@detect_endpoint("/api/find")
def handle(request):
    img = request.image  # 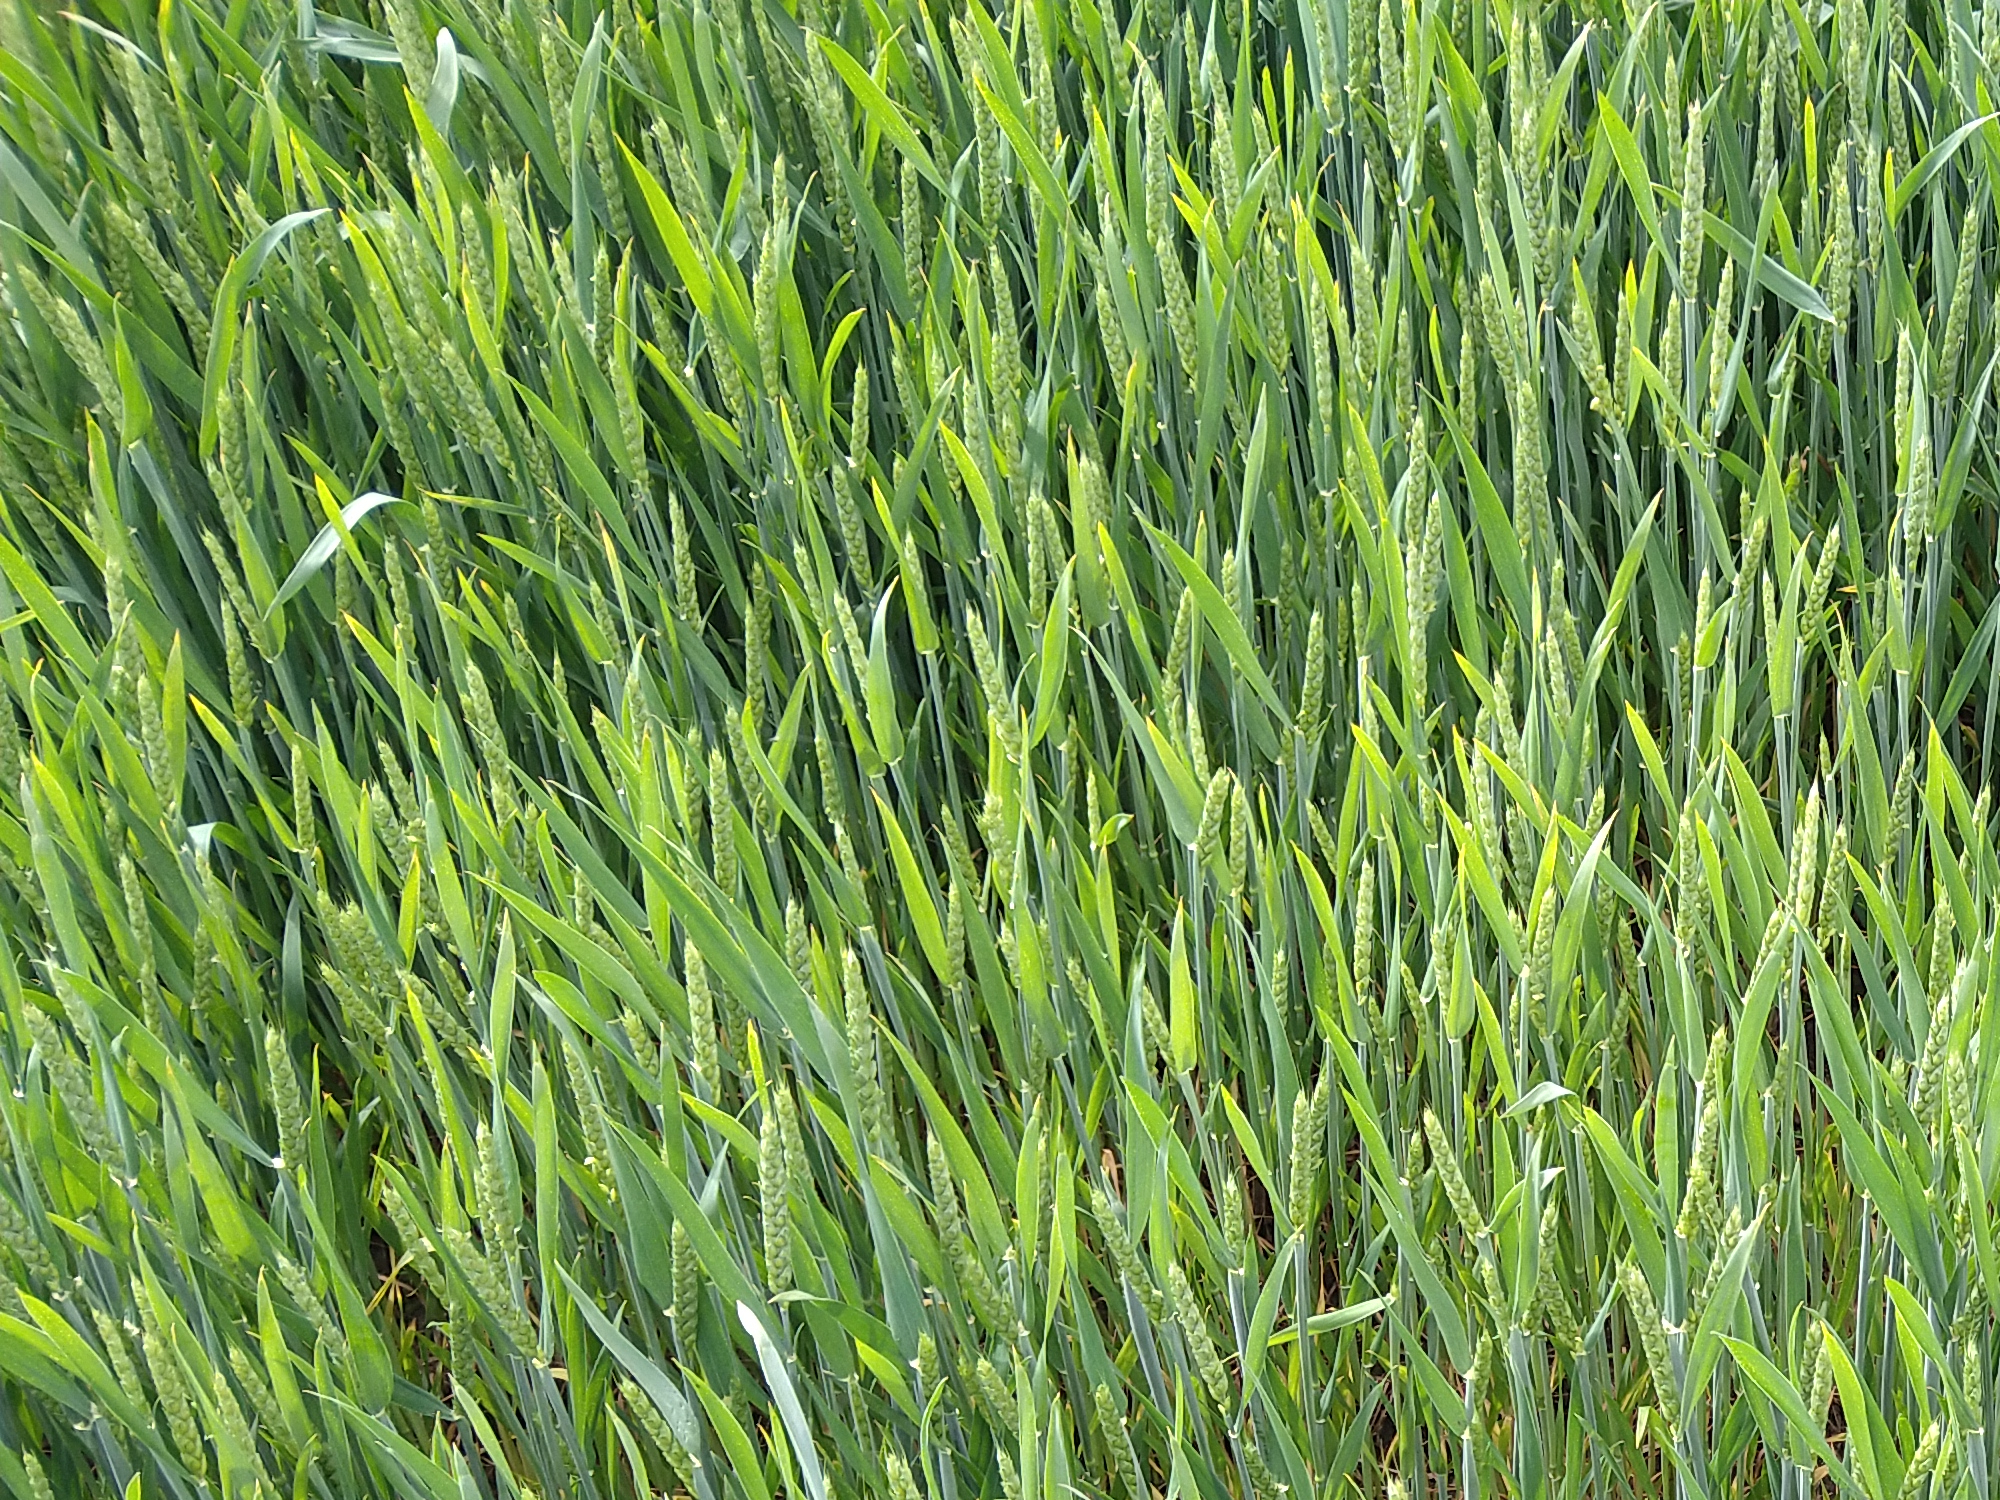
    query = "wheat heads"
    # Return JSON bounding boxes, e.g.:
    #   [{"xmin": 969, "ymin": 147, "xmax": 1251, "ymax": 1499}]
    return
[
  {"xmin": 1141, "ymin": 1004, "xmax": 1158, "ymax": 1072},
  {"xmin": 1912, "ymin": 995, "xmax": 1953, "ymax": 1135},
  {"xmin": 756, "ymin": 230, "xmax": 782, "ymax": 398},
  {"xmin": 806, "ymin": 0, "xmax": 835, "ymax": 37},
  {"xmin": 1796, "ymin": 528, "xmax": 1840, "ymax": 632},
  {"xmin": 955, "ymin": 1249, "xmax": 1016, "ymax": 1341},
  {"xmin": 1994, "ymin": 290, "xmax": 2000, "ymax": 407},
  {"xmin": 648, "ymin": 292, "xmax": 700, "ymax": 393},
  {"xmin": 1752, "ymin": 925, "xmax": 1792, "ymax": 988},
  {"xmin": 539, "ymin": 40, "xmax": 573, "ymax": 177},
  {"xmin": 142, "ymin": 1337, "xmax": 208, "ymax": 1480},
  {"xmin": 1354, "ymin": 859, "xmax": 1377, "ymax": 1005},
  {"xmin": 834, "ymin": 597, "xmax": 869, "ymax": 684},
  {"xmin": 1831, "ymin": 179, "xmax": 1850, "ymax": 320},
  {"xmin": 1517, "ymin": 381, "xmax": 1557, "ymax": 561},
  {"xmin": 1452, "ymin": 0, "xmax": 1470, "ymax": 62},
  {"xmin": 967, "ymin": 611, "xmax": 1025, "ymax": 757},
  {"xmin": 418, "ymin": 492, "xmax": 458, "ymax": 601},
  {"xmin": 1545, "ymin": 631, "xmax": 1565, "ymax": 731},
  {"xmin": 1755, "ymin": 75, "xmax": 1775, "ymax": 193},
  {"xmin": 1300, "ymin": 599, "xmax": 1326, "ymax": 740},
  {"xmin": 303, "ymin": 485, "xmax": 327, "ymax": 534},
  {"xmin": 683, "ymin": 943, "xmax": 719, "ymax": 1086},
  {"xmin": 273, "ymin": 1252, "xmax": 353, "ymax": 1371},
  {"xmin": 1892, "ymin": 71, "xmax": 1910, "ymax": 190},
  {"xmin": 1612, "ymin": 984, "xmax": 1634, "ymax": 1046},
  {"xmin": 948, "ymin": 879, "xmax": 967, "ymax": 989},
  {"xmin": 1730, "ymin": 521, "xmax": 1766, "ymax": 641},
  {"xmin": 1489, "ymin": 666, "xmax": 1525, "ymax": 785},
  {"xmin": 1321, "ymin": 942, "xmax": 1345, "ymax": 1029},
  {"xmin": 266, "ymin": 0, "xmax": 311, "ymax": 96},
  {"xmin": 1699, "ymin": 1026, "xmax": 1726, "ymax": 1133},
  {"xmin": 1944, "ymin": 205, "xmax": 1978, "ymax": 399},
  {"xmin": 439, "ymin": 1229, "xmax": 533, "ymax": 1361},
  {"xmin": 441, "ymin": 348, "xmax": 512, "ymax": 461},
  {"xmin": 1474, "ymin": 102, "xmax": 1489, "ymax": 208},
  {"xmin": 705, "ymin": 0, "xmax": 741, "ymax": 82},
  {"xmin": 1212, "ymin": 149, "xmax": 1228, "ymax": 241},
  {"xmin": 589, "ymin": 114, "xmax": 634, "ymax": 249},
  {"xmin": 1068, "ymin": 959, "xmax": 1089, "ymax": 1016},
  {"xmin": 592, "ymin": 249, "xmax": 611, "ymax": 393},
  {"xmin": 706, "ymin": 752, "xmax": 745, "ymax": 916},
  {"xmin": 1337, "ymin": 583, "xmax": 1345, "ymax": 671},
  {"xmin": 106, "ymin": 220, "xmax": 132, "ymax": 313},
  {"xmin": 1167, "ymin": 1270, "xmax": 1234, "ymax": 1432},
  {"xmin": 1549, "ymin": 561, "xmax": 1565, "ymax": 640},
  {"xmin": 21, "ymin": 1451, "xmax": 76, "ymax": 1500},
  {"xmin": 1562, "ymin": 613, "xmax": 1589, "ymax": 693},
  {"xmin": 1681, "ymin": 100, "xmax": 1703, "ymax": 301},
  {"xmin": 1035, "ymin": 48, "xmax": 1054, "ymax": 162},
  {"xmin": 491, "ymin": 172, "xmax": 549, "ymax": 337},
  {"xmin": 1379, "ymin": 0, "xmax": 1411, "ymax": 140},
  {"xmin": 834, "ymin": 825, "xmax": 867, "ymax": 923},
  {"xmin": 1456, "ymin": 335, "xmax": 1477, "ymax": 453},
  {"xmin": 1806, "ymin": 0, "xmax": 1819, "ymax": 46},
  {"xmin": 472, "ymin": 1171, "xmax": 509, "ymax": 1292},
  {"xmin": 1310, "ymin": 1075, "xmax": 1333, "ymax": 1170},
  {"xmin": 51, "ymin": 441, "xmax": 96, "ymax": 522},
  {"xmin": 992, "ymin": 1432, "xmax": 1046, "ymax": 1500},
  {"xmin": 1476, "ymin": 1262, "xmax": 1508, "ymax": 1330},
  {"xmin": 1664, "ymin": 49, "xmax": 1679, "ymax": 193},
  {"xmin": 554, "ymin": 241, "xmax": 592, "ymax": 350},
  {"xmin": 1143, "ymin": 61, "xmax": 1167, "ymax": 246},
  {"xmin": 690, "ymin": 733, "xmax": 702, "ymax": 851},
  {"xmin": 915, "ymin": 1335, "xmax": 946, "ymax": 1436},
  {"xmin": 1179, "ymin": 697, "xmax": 1214, "ymax": 790},
  {"xmin": 104, "ymin": 42, "xmax": 135, "ymax": 104},
  {"xmin": 520, "ymin": 812, "xmax": 542, "ymax": 884},
  {"xmin": 1022, "ymin": 0, "xmax": 1043, "ymax": 101},
  {"xmin": 999, "ymin": 922, "xmax": 1023, "ymax": 989},
  {"xmin": 668, "ymin": 1215, "xmax": 698, "ymax": 1370},
  {"xmin": 630, "ymin": 671, "xmax": 651, "ymax": 752},
  {"xmin": 1659, "ymin": 293, "xmax": 1678, "ymax": 433},
  {"xmin": 1291, "ymin": 1095, "xmax": 1313, "ymax": 1221},
  {"xmin": 23, "ymin": 1007, "xmax": 134, "ymax": 1192},
  {"xmin": 1089, "ymin": 765, "xmax": 1100, "ymax": 845},
  {"xmin": 1352, "ymin": 578, "xmax": 1370, "ymax": 652},
  {"xmin": 1826, "ymin": 86, "xmax": 1848, "ymax": 172},
  {"xmin": 558, "ymin": 1032, "xmax": 619, "ymax": 1195},
  {"xmin": 499, "ymin": 586, "xmax": 537, "ymax": 700},
  {"xmin": 1741, "ymin": 28, "xmax": 1757, "ymax": 94},
  {"xmin": 1464, "ymin": 292, "xmax": 1488, "ymax": 380},
  {"xmin": 900, "ymin": 152, "xmax": 926, "ymax": 313},
  {"xmin": 98, "ymin": 106, "xmax": 146, "ymax": 233},
  {"xmin": 377, "ymin": 739, "xmax": 432, "ymax": 841},
  {"xmin": 359, "ymin": 66, "xmax": 395, "ymax": 210},
  {"xmin": 873, "ymin": 1077, "xmax": 907, "ymax": 1170},
  {"xmin": 1395, "ymin": 307, "xmax": 1414, "ymax": 437},
  {"xmin": 899, "ymin": 26, "xmax": 939, "ymax": 132},
  {"xmin": 1348, "ymin": 0, "xmax": 1384, "ymax": 110},
  {"xmin": 464, "ymin": 204, "xmax": 493, "ymax": 329},
  {"xmin": 1215, "ymin": 109, "xmax": 1236, "ymax": 233},
  {"xmin": 1032, "ymin": 1164, "xmax": 1054, "ymax": 1281},
  {"xmin": 496, "ymin": 0, "xmax": 523, "ymax": 77},
  {"xmin": 480, "ymin": 26, "xmax": 539, "ymax": 193},
  {"xmin": 929, "ymin": 332, "xmax": 961, "ymax": 483},
  {"xmin": 1531, "ymin": 1192, "xmax": 1558, "ymax": 1331},
  {"xmin": 961, "ymin": 379, "xmax": 990, "ymax": 473},
  {"xmin": 1519, "ymin": 141, "xmax": 1551, "ymax": 290},
  {"xmin": 886, "ymin": 1453, "xmax": 934, "ymax": 1500},
  {"xmin": 889, "ymin": 350, "xmax": 929, "ymax": 441},
  {"xmin": 990, "ymin": 244, "xmax": 1021, "ymax": 411},
  {"xmin": 507, "ymin": 409, "xmax": 563, "ymax": 541},
  {"xmin": 1165, "ymin": 680, "xmax": 1186, "ymax": 760},
  {"xmin": 452, "ymin": 1297, "xmax": 474, "ymax": 1420},
  {"xmin": 644, "ymin": 130, "xmax": 660, "ymax": 185},
  {"xmin": 1511, "ymin": 19, "xmax": 1527, "ymax": 160},
  {"xmin": 382, "ymin": 0, "xmax": 440, "ymax": 100},
  {"xmin": 615, "ymin": 1377, "xmax": 692, "ymax": 1493},
  {"xmin": 376, "ymin": 377, "xmax": 437, "ymax": 507},
  {"xmin": 1012, "ymin": 499, "xmax": 1029, "ymax": 581},
  {"xmin": 1953, "ymin": 1277, "xmax": 1988, "ymax": 1337},
  {"xmin": 1688, "ymin": 874, "xmax": 1714, "ymax": 985},
  {"xmin": 1893, "ymin": 1425, "xmax": 1939, "ymax": 1500},
  {"xmin": 0, "ymin": 1193, "xmax": 62, "ymax": 1302},
  {"xmin": 922, "ymin": 1136, "xmax": 972, "ymax": 1293},
  {"xmin": 88, "ymin": 1305, "xmax": 149, "ymax": 1427},
  {"xmin": 1947, "ymin": 1056, "xmax": 1974, "ymax": 1148},
  {"xmin": 1892, "ymin": 332, "xmax": 1907, "ymax": 468},
  {"xmin": 368, "ymin": 274, "xmax": 424, "ymax": 417},
  {"xmin": 1560, "ymin": 887, "xmax": 1581, "ymax": 1018},
  {"xmin": 1422, "ymin": 135, "xmax": 1450, "ymax": 190},
  {"xmin": 1926, "ymin": 882, "xmax": 1951, "ymax": 1005},
  {"xmin": 1353, "ymin": 253, "xmax": 1379, "ymax": 385},
  {"xmin": 1883, "ymin": 0, "xmax": 1905, "ymax": 75},
  {"xmin": 2, "ymin": 326, "xmax": 43, "ymax": 409},
  {"xmin": 383, "ymin": 1188, "xmax": 450, "ymax": 1308},
  {"xmin": 790, "ymin": 545, "xmax": 828, "ymax": 644},
  {"xmin": 592, "ymin": 712, "xmax": 626, "ymax": 817},
  {"xmin": 1944, "ymin": 0, "xmax": 1962, "ymax": 124},
  {"xmin": 1403, "ymin": 5, "xmax": 1418, "ymax": 134},
  {"xmin": 1786, "ymin": 817, "xmax": 1803, "ymax": 915},
  {"xmin": 1367, "ymin": 997, "xmax": 1391, "ymax": 1054},
  {"xmin": 1837, "ymin": 0, "xmax": 1865, "ymax": 77},
  {"xmin": 313, "ymin": 891, "xmax": 377, "ymax": 992},
  {"xmin": 59, "ymin": 300, "xmax": 120, "ymax": 425},
  {"xmin": 24, "ymin": 88, "xmax": 63, "ymax": 204},
  {"xmin": 580, "ymin": 865, "xmax": 592, "ymax": 938},
  {"xmin": 667, "ymin": 501, "xmax": 700, "ymax": 627},
  {"xmin": 1795, "ymin": 1323, "xmax": 1820, "ymax": 1409},
  {"xmin": 841, "ymin": 949, "xmax": 889, "ymax": 1143},
  {"xmin": 906, "ymin": 532, "xmax": 920, "ymax": 606},
  {"xmin": 1867, "ymin": 158, "xmax": 1888, "ymax": 285},
  {"xmin": 709, "ymin": 297, "xmax": 753, "ymax": 417},
  {"xmin": 1593, "ymin": 874, "xmax": 1612, "ymax": 955},
  {"xmin": 1281, "ymin": 544, "xmax": 1300, "ymax": 639},
  {"xmin": 318, "ymin": 967, "xmax": 386, "ymax": 1045},
  {"xmin": 1167, "ymin": 587, "xmax": 1194, "ymax": 699},
  {"xmin": 103, "ymin": 197, "xmax": 207, "ymax": 366},
  {"xmin": 1141, "ymin": 985, "xmax": 1178, "ymax": 1069},
  {"xmin": 288, "ymin": 745, "xmax": 318, "ymax": 863},
  {"xmin": 284, "ymin": 200, "xmax": 323, "ymax": 302},
  {"xmin": 409, "ymin": 329, "xmax": 477, "ymax": 449},
  {"xmin": 1570, "ymin": 303, "xmax": 1614, "ymax": 424},
  {"xmin": 1675, "ymin": 1094, "xmax": 1724, "ymax": 1233},
  {"xmin": 586, "ymin": 581, "xmax": 623, "ymax": 668},
  {"xmin": 0, "ymin": 460, "xmax": 71, "ymax": 562},
  {"xmin": 1533, "ymin": 888, "xmax": 1558, "ymax": 1034},
  {"xmin": 1702, "ymin": 9, "xmax": 1719, "ymax": 88},
  {"xmin": 608, "ymin": 356, "xmax": 645, "ymax": 491},
  {"xmin": 391, "ymin": 972, "xmax": 485, "ymax": 1057},
  {"xmin": 1507, "ymin": 802, "xmax": 1539, "ymax": 919},
  {"xmin": 773, "ymin": 1085, "xmax": 813, "ymax": 1188},
  {"xmin": 755, "ymin": 1111, "xmax": 800, "ymax": 1293},
  {"xmin": 102, "ymin": 800, "xmax": 127, "ymax": 859},
  {"xmin": 1093, "ymin": 1382, "xmax": 1142, "ymax": 1500},
  {"xmin": 929, "ymin": 124, "xmax": 950, "ymax": 178},
  {"xmin": 19, "ymin": 266, "xmax": 95, "ymax": 380},
  {"xmin": 1220, "ymin": 546, "xmax": 1235, "ymax": 626},
  {"xmin": 338, "ymin": 549, "xmax": 351, "ymax": 655},
  {"xmin": 751, "ymin": 0, "xmax": 804, "ymax": 165},
  {"xmin": 612, "ymin": 0, "xmax": 640, "ymax": 88},
  {"xmin": 1813, "ymin": 297, "xmax": 1833, "ymax": 365},
  {"xmin": 127, "ymin": 51, "xmax": 177, "ymax": 210},
  {"xmin": 851, "ymin": 364, "xmax": 868, "ymax": 467},
  {"xmin": 1535, "ymin": 1247, "xmax": 1581, "ymax": 1345},
  {"xmin": 1422, "ymin": 1105, "xmax": 1486, "ymax": 1251},
  {"xmin": 151, "ymin": 427, "xmax": 191, "ymax": 514},
  {"xmin": 1089, "ymin": 1194, "xmax": 1180, "ymax": 1330},
  {"xmin": 1218, "ymin": 1183, "xmax": 1247, "ymax": 1255},
  {"xmin": 1784, "ymin": 464, "xmax": 1803, "ymax": 518},
  {"xmin": 1675, "ymin": 631, "xmax": 1696, "ymax": 732},
  {"xmin": 340, "ymin": 898, "xmax": 405, "ymax": 1004},
  {"xmin": 539, "ymin": 0, "xmax": 579, "ymax": 91},
  {"xmin": 1406, "ymin": 414, "xmax": 1425, "ymax": 555},
  {"xmin": 1258, "ymin": 239, "xmax": 1287, "ymax": 371},
  {"xmin": 1085, "ymin": 132, "xmax": 1123, "ymax": 258},
  {"xmin": 215, "ymin": 385, "xmax": 247, "ymax": 502},
  {"xmin": 1227, "ymin": 805, "xmax": 1277, "ymax": 890},
  {"xmin": 1796, "ymin": 787, "xmax": 1816, "ymax": 931},
  {"xmin": 810, "ymin": 725, "xmax": 846, "ymax": 823},
  {"xmin": 934, "ymin": 808, "xmax": 981, "ymax": 903},
  {"xmin": 308, "ymin": 189, "xmax": 348, "ymax": 294},
  {"xmin": 1963, "ymin": 1349, "xmax": 1979, "ymax": 1421},
  {"xmin": 1699, "ymin": 1203, "xmax": 1741, "ymax": 1320},
  {"xmin": 1424, "ymin": 493, "xmax": 1443, "ymax": 610},
  {"xmin": 1419, "ymin": 753, "xmax": 1432, "ymax": 837},
  {"xmin": 842, "ymin": 1374, "xmax": 879, "ymax": 1463},
  {"xmin": 233, "ymin": 181, "xmax": 305, "ymax": 305},
  {"xmin": 618, "ymin": 1009, "xmax": 662, "ymax": 1079},
  {"xmin": 876, "ymin": 136, "xmax": 891, "ymax": 213},
  {"xmin": 981, "ymin": 797, "xmax": 1015, "ymax": 895},
  {"xmin": 1310, "ymin": 0, "xmax": 1344, "ymax": 128},
  {"xmin": 798, "ymin": 80, "xmax": 835, "ymax": 209},
  {"xmin": 1451, "ymin": 264, "xmax": 1470, "ymax": 316},
  {"xmin": 1338, "ymin": 314, "xmax": 1359, "ymax": 414},
  {"xmin": 99, "ymin": 558, "xmax": 142, "ymax": 740},
  {"xmin": 201, "ymin": 457, "xmax": 239, "ymax": 546},
  {"xmin": 1906, "ymin": 433, "xmax": 1930, "ymax": 579},
  {"xmin": 192, "ymin": 923, "xmax": 211, "ymax": 1029},
  {"xmin": 979, "ymin": 77, "xmax": 998, "ymax": 221},
  {"xmin": 1272, "ymin": 956, "xmax": 1288, "ymax": 1029},
  {"xmin": 653, "ymin": 116, "xmax": 714, "ymax": 257},
  {"xmin": 1352, "ymin": 100, "xmax": 1397, "ymax": 227},
  {"xmin": 1807, "ymin": 1353, "xmax": 1833, "ymax": 1433},
  {"xmin": 1503, "ymin": 630, "xmax": 1516, "ymax": 704},
  {"xmin": 780, "ymin": 903, "xmax": 808, "ymax": 988},
  {"xmin": 439, "ymin": 957, "xmax": 476, "ymax": 1018},
  {"xmin": 723, "ymin": 709, "xmax": 775, "ymax": 833},
  {"xmin": 1305, "ymin": 497, "xmax": 1321, "ymax": 570},
  {"xmin": 948, "ymin": 16, "xmax": 981, "ymax": 93},
  {"xmin": 1162, "ymin": 236, "xmax": 1202, "ymax": 390},
  {"xmin": 1090, "ymin": 274, "xmax": 1130, "ymax": 404},
  {"xmin": 1399, "ymin": 959, "xmax": 1427, "ymax": 1078},
  {"xmin": 1306, "ymin": 800, "xmax": 1334, "ymax": 870},
  {"xmin": 1028, "ymin": 493, "xmax": 1045, "ymax": 634},
  {"xmin": 472, "ymin": 1125, "xmax": 524, "ymax": 1272},
  {"xmin": 385, "ymin": 540, "xmax": 412, "ymax": 654},
  {"xmin": 370, "ymin": 785, "xmax": 451, "ymax": 940},
  {"xmin": 388, "ymin": 202, "xmax": 443, "ymax": 340},
  {"xmin": 0, "ymin": 1279, "xmax": 38, "ymax": 1325},
  {"xmin": 1740, "ymin": 493, "xmax": 1753, "ymax": 568},
  {"xmin": 1342, "ymin": 447, "xmax": 1368, "ymax": 528},
  {"xmin": 1614, "ymin": 907, "xmax": 1634, "ymax": 991},
  {"xmin": 1428, "ymin": 927, "xmax": 1452, "ymax": 1014},
  {"xmin": 218, "ymin": 599, "xmax": 252, "ymax": 721},
  {"xmin": 1967, "ymin": 789, "xmax": 1989, "ymax": 860},
  {"xmin": 1509, "ymin": 977, "xmax": 1524, "ymax": 1068},
  {"xmin": 1770, "ymin": 0, "xmax": 1801, "ymax": 123},
  {"xmin": 1478, "ymin": 275, "xmax": 1516, "ymax": 418},
  {"xmin": 1850, "ymin": 36, "xmax": 1871, "ymax": 157},
  {"xmin": 1816, "ymin": 826, "xmax": 1849, "ymax": 947},
  {"xmin": 463, "ymin": 664, "xmax": 520, "ymax": 825},
  {"xmin": 1401, "ymin": 541, "xmax": 1426, "ymax": 719},
  {"xmin": 976, "ymin": 1357, "xmax": 1020, "ymax": 1440},
  {"xmin": 1467, "ymin": 709, "xmax": 1503, "ymax": 879},
  {"xmin": 1882, "ymin": 749, "xmax": 1912, "ymax": 871},
  {"xmin": 1529, "ymin": 23, "xmax": 1548, "ymax": 115},
  {"xmin": 1180, "ymin": 22, "xmax": 1199, "ymax": 148},
  {"xmin": 1679, "ymin": 814, "xmax": 1694, "ymax": 975},
  {"xmin": 1977, "ymin": 0, "xmax": 2000, "ymax": 132},
  {"xmin": 1194, "ymin": 769, "xmax": 1227, "ymax": 870},
  {"xmin": 1696, "ymin": 568, "xmax": 1705, "ymax": 636},
  {"xmin": 0, "ymin": 406, "xmax": 74, "ymax": 510},
  {"xmin": 829, "ymin": 465, "xmax": 877, "ymax": 598},
  {"xmin": 1510, "ymin": 425, "xmax": 1530, "ymax": 557},
  {"xmin": 772, "ymin": 149, "xmax": 790, "ymax": 270},
  {"xmin": 1713, "ymin": 252, "xmax": 1732, "ymax": 409},
  {"xmin": 115, "ymin": 854, "xmax": 160, "ymax": 1042},
  {"xmin": 225, "ymin": 1342, "xmax": 293, "ymax": 1450},
  {"xmin": 1872, "ymin": 574, "xmax": 1885, "ymax": 650},
  {"xmin": 261, "ymin": 1025, "xmax": 310, "ymax": 1179},
  {"xmin": 1512, "ymin": 290, "xmax": 1527, "ymax": 379},
  {"xmin": 741, "ymin": 597, "xmax": 763, "ymax": 731},
  {"xmin": 1205, "ymin": 50, "xmax": 1231, "ymax": 125},
  {"xmin": 1041, "ymin": 505, "xmax": 1066, "ymax": 573},
  {"xmin": 1609, "ymin": 294, "xmax": 1627, "ymax": 434},
  {"xmin": 1252, "ymin": 108, "xmax": 1287, "ymax": 233},
  {"xmin": 810, "ymin": 34, "xmax": 854, "ymax": 262},
  {"xmin": 1621, "ymin": 1262, "xmax": 1675, "ymax": 1424},
  {"xmin": 1470, "ymin": 1331, "xmax": 1495, "ymax": 1392},
  {"xmin": 550, "ymin": 658, "xmax": 565, "ymax": 707},
  {"xmin": 1406, "ymin": 1130, "xmax": 1426, "ymax": 1237},
  {"xmin": 135, "ymin": 674, "xmax": 184, "ymax": 841},
  {"xmin": 1087, "ymin": 465, "xmax": 1114, "ymax": 609},
  {"xmin": 1307, "ymin": 275, "xmax": 1326, "ymax": 431},
  {"xmin": 198, "ymin": 525, "xmax": 273, "ymax": 659},
  {"xmin": 1589, "ymin": 784, "xmax": 1602, "ymax": 845}
]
